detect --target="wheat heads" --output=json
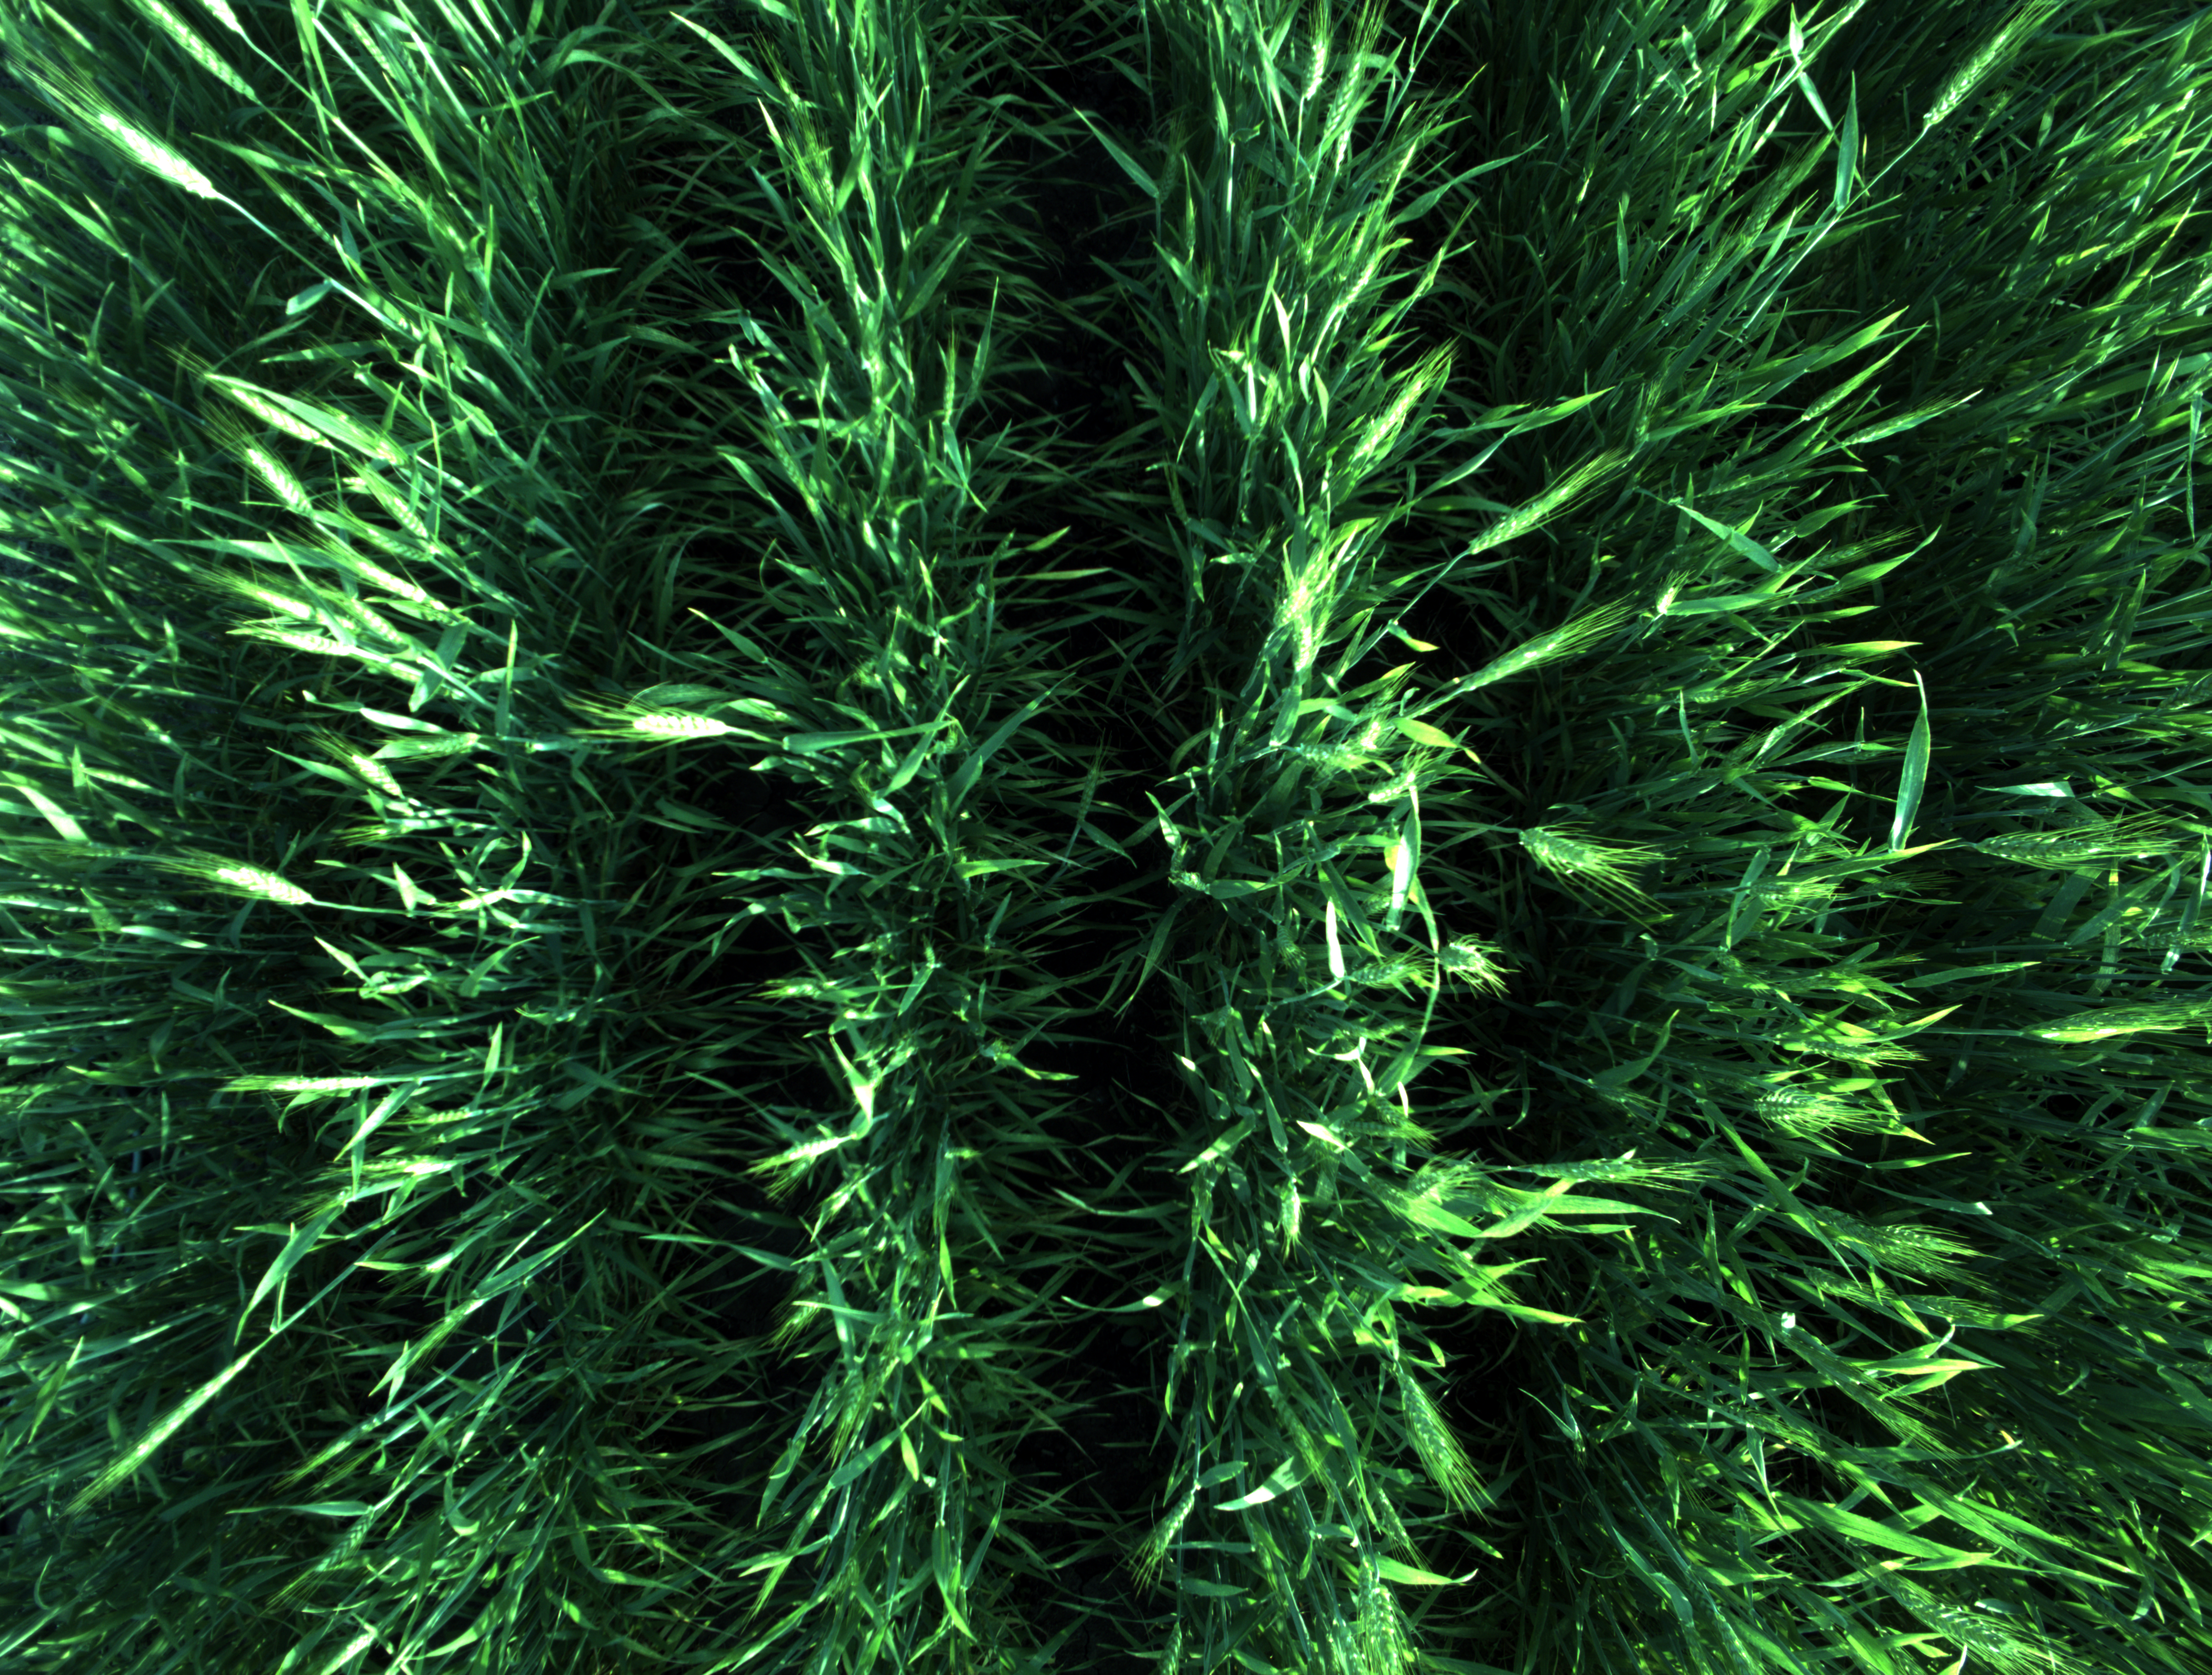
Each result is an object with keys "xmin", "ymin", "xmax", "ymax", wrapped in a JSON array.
[
  {"xmin": 292, "ymin": 202, "xmax": 330, "ymax": 244},
  {"xmin": 1357, "ymin": 962, "xmax": 1422, "ymax": 991},
  {"xmin": 1341, "ymin": 1116, "xmax": 1418, "ymax": 1141},
  {"xmin": 1304, "ymin": 31, "xmax": 1327, "ymax": 101},
  {"xmin": 325, "ymin": 1511, "xmax": 377, "ymax": 1566},
  {"xmin": 1805, "ymin": 1201, "xmax": 1891, "ymax": 1254},
  {"xmin": 1361, "ymin": 381, "xmax": 1424, "ymax": 468},
  {"xmin": 98, "ymin": 109, "xmax": 211, "ymax": 198},
  {"xmin": 270, "ymin": 1072, "xmax": 377, "ymax": 1093},
  {"xmin": 1278, "ymin": 1398, "xmax": 1331, "ymax": 1485},
  {"xmin": 1372, "ymin": 1590, "xmax": 1406, "ymax": 1667},
  {"xmin": 359, "ymin": 558, "xmax": 450, "ymax": 612},
  {"xmin": 1873, "ymin": 1568, "xmax": 2009, "ymax": 1653},
  {"xmin": 1285, "ymin": 1187, "xmax": 1307, "ymax": 1250},
  {"xmin": 1372, "ymin": 770, "xmax": 1424, "ymax": 806},
  {"xmin": 529, "ymin": 194, "xmax": 550, "ymax": 239},
  {"xmin": 2125, "ymin": 919, "xmax": 2212, "ymax": 947},
  {"xmin": 1327, "ymin": 49, "xmax": 1362, "ymax": 139},
  {"xmin": 2151, "ymin": 249, "xmax": 2207, "ymax": 313},
  {"xmin": 421, "ymin": 1246, "xmax": 464, "ymax": 1275},
  {"xmin": 1469, "ymin": 495, "xmax": 1556, "ymax": 557},
  {"xmin": 870, "ymin": 395, "xmax": 889, "ymax": 444},
  {"xmin": 316, "ymin": 398, "xmax": 408, "ymax": 459},
  {"xmin": 1353, "ymin": 1556, "xmax": 1376, "ymax": 1631},
  {"xmin": 792, "ymin": 1296, "xmax": 829, "ymax": 1328},
  {"xmin": 1272, "ymin": 928, "xmax": 1309, "ymax": 975},
  {"xmin": 248, "ymin": 446, "xmax": 321, "ymax": 523},
  {"xmin": 1410, "ymin": 1167, "xmax": 1444, "ymax": 1193},
  {"xmin": 1762, "ymin": 1321, "xmax": 1865, "ymax": 1375},
  {"xmin": 1800, "ymin": 0, "xmax": 1859, "ymax": 53},
  {"xmin": 1679, "ymin": 233, "xmax": 1736, "ymax": 306},
  {"xmin": 771, "ymin": 437, "xmax": 814, "ymax": 503},
  {"xmin": 1353, "ymin": 717, "xmax": 1386, "ymax": 752},
  {"xmin": 1169, "ymin": 845, "xmax": 1185, "ymax": 875},
  {"xmin": 859, "ymin": 1370, "xmax": 887, "ymax": 1426},
  {"xmin": 1159, "ymin": 1620, "xmax": 1189, "ymax": 1675},
  {"xmin": 838, "ymin": 1373, "xmax": 868, "ymax": 1436},
  {"xmin": 939, "ymin": 348, "xmax": 959, "ymax": 425},
  {"xmin": 327, "ymin": 1412, "xmax": 378, "ymax": 1458},
  {"xmin": 417, "ymin": 1106, "xmax": 476, "ymax": 1124},
  {"xmin": 822, "ymin": 1189, "xmax": 853, "ymax": 1215},
  {"xmin": 135, "ymin": 0, "xmax": 255, "ymax": 102},
  {"xmin": 1390, "ymin": 1373, "xmax": 1457, "ymax": 1479},
  {"xmin": 1507, "ymin": 827, "xmax": 1598, "ymax": 877},
  {"xmin": 781, "ymin": 153, "xmax": 829, "ymax": 221},
  {"xmin": 1744, "ymin": 887, "xmax": 1798, "ymax": 910},
  {"xmin": 516, "ymin": 3, "xmax": 550, "ymax": 46},
  {"xmin": 1687, "ymin": 685, "xmax": 1736, "ymax": 701},
  {"xmin": 803, "ymin": 1641, "xmax": 837, "ymax": 1671},
  {"xmin": 1369, "ymin": 1175, "xmax": 1410, "ymax": 1213},
  {"xmin": 1817, "ymin": 1371, "xmax": 1902, "ymax": 1430},
  {"xmin": 370, "ymin": 1154, "xmax": 456, "ymax": 1178},
  {"xmin": 1256, "ymin": 377, "xmax": 1278, "ymax": 428},
  {"xmin": 1377, "ymin": 128, "xmax": 1408, "ymax": 186},
  {"xmin": 436, "ymin": 1304, "xmax": 475, "ymax": 1335},
  {"xmin": 1424, "ymin": 246, "xmax": 1452, "ymax": 292},
  {"xmin": 2125, "ymin": 1123, "xmax": 2179, "ymax": 1145},
  {"xmin": 1628, "ymin": 403, "xmax": 1653, "ymax": 442},
  {"xmin": 378, "ymin": 493, "xmax": 450, "ymax": 554},
  {"xmin": 1074, "ymin": 771, "xmax": 1100, "ymax": 835},
  {"xmin": 338, "ymin": 1179, "xmax": 407, "ymax": 1198},
  {"xmin": 1438, "ymin": 944, "xmax": 1487, "ymax": 977},
  {"xmin": 236, "ymin": 576, "xmax": 355, "ymax": 628},
  {"xmin": 190, "ymin": 0, "xmax": 251, "ymax": 42},
  {"xmin": 1293, "ymin": 744, "xmax": 1372, "ymax": 772},
  {"xmin": 1752, "ymin": 1092, "xmax": 1849, "ymax": 1130},
  {"xmin": 278, "ymin": 629, "xmax": 358, "ymax": 660},
  {"xmin": 349, "ymin": 752, "xmax": 405, "ymax": 801},
  {"xmin": 1788, "ymin": 545, "xmax": 1869, "ymax": 572},
  {"xmin": 1851, "ymin": 408, "xmax": 1948, "ymax": 448},
  {"xmin": 794, "ymin": 92, "xmax": 837, "ymax": 206},
  {"xmin": 1693, "ymin": 476, "xmax": 1750, "ymax": 503},
  {"xmin": 772, "ymin": 982, "xmax": 823, "ymax": 1002},
  {"xmin": 211, "ymin": 859, "xmax": 309, "ymax": 909},
  {"xmin": 635, "ymin": 700, "xmax": 734, "ymax": 748},
  {"xmin": 1709, "ymin": 1606, "xmax": 1754, "ymax": 1671},
  {"xmin": 223, "ymin": 385, "xmax": 327, "ymax": 446},
  {"xmin": 1853, "ymin": 1220, "xmax": 1944, "ymax": 1258},
  {"xmin": 1647, "ymin": 580, "xmax": 1685, "ymax": 614},
  {"xmin": 131, "ymin": 1357, "xmax": 251, "ymax": 1459},
  {"xmin": 404, "ymin": 733, "xmax": 479, "ymax": 757},
  {"xmin": 1984, "ymin": 828, "xmax": 2099, "ymax": 872},
  {"xmin": 1230, "ymin": 179, "xmax": 1253, "ymax": 232},
  {"xmin": 1748, "ymin": 163, "xmax": 1796, "ymax": 248},
  {"xmin": 365, "ymin": 821, "xmax": 408, "ymax": 841},
  {"xmin": 1160, "ymin": 148, "xmax": 1182, "ymax": 199},
  {"xmin": 1776, "ymin": 1029, "xmax": 1877, "ymax": 1062},
  {"xmin": 1805, "ymin": 377, "xmax": 1861, "ymax": 416},
  {"xmin": 1891, "ymin": 1290, "xmax": 1978, "ymax": 1329},
  {"xmin": 1345, "ymin": 248, "xmax": 1388, "ymax": 308},
  {"xmin": 1469, "ymin": 634, "xmax": 1578, "ymax": 687},
  {"xmin": 1920, "ymin": 21, "xmax": 2026, "ymax": 122},
  {"xmin": 343, "ymin": 594, "xmax": 404, "ymax": 640},
  {"xmin": 2036, "ymin": 1004, "xmax": 2194, "ymax": 1038},
  {"xmin": 2013, "ymin": 1232, "xmax": 2056, "ymax": 1267},
  {"xmin": 1374, "ymin": 1098, "xmax": 1406, "ymax": 1122},
  {"xmin": 785, "ymin": 1132, "xmax": 849, "ymax": 1161},
  {"xmin": 1359, "ymin": 887, "xmax": 1392, "ymax": 920},
  {"xmin": 1165, "ymin": 485, "xmax": 1187, "ymax": 525},
  {"xmin": 1446, "ymin": 1246, "xmax": 1495, "ymax": 1288},
  {"xmin": 1293, "ymin": 620, "xmax": 1321, "ymax": 677},
  {"xmin": 1786, "ymin": 586, "xmax": 1841, "ymax": 610},
  {"xmin": 1268, "ymin": 574, "xmax": 1319, "ymax": 653},
  {"xmin": 1521, "ymin": 1155, "xmax": 1643, "ymax": 1183},
  {"xmin": 1147, "ymin": 1491, "xmax": 1196, "ymax": 1544},
  {"xmin": 972, "ymin": 339, "xmax": 990, "ymax": 402}
]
